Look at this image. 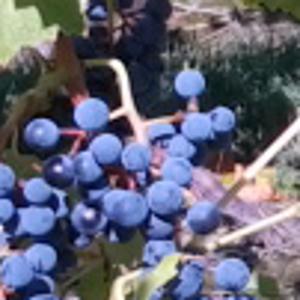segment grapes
Masks as SVG:
<instances>
[{
  "label": "grapes",
  "mask_w": 300,
  "mask_h": 300,
  "mask_svg": "<svg viewBox=\"0 0 300 300\" xmlns=\"http://www.w3.org/2000/svg\"><path fill=\"white\" fill-rule=\"evenodd\" d=\"M213 278V284L218 291L236 293L248 284L250 267L243 260L228 258L215 266Z\"/></svg>",
  "instance_id": "obj_4"
},
{
  "label": "grapes",
  "mask_w": 300,
  "mask_h": 300,
  "mask_svg": "<svg viewBox=\"0 0 300 300\" xmlns=\"http://www.w3.org/2000/svg\"><path fill=\"white\" fill-rule=\"evenodd\" d=\"M187 227L199 238H209L217 234L223 224L220 205L212 199L193 203L186 213Z\"/></svg>",
  "instance_id": "obj_3"
},
{
  "label": "grapes",
  "mask_w": 300,
  "mask_h": 300,
  "mask_svg": "<svg viewBox=\"0 0 300 300\" xmlns=\"http://www.w3.org/2000/svg\"><path fill=\"white\" fill-rule=\"evenodd\" d=\"M207 282V271L197 261H185L171 280V285L160 287L150 300H197Z\"/></svg>",
  "instance_id": "obj_2"
},
{
  "label": "grapes",
  "mask_w": 300,
  "mask_h": 300,
  "mask_svg": "<svg viewBox=\"0 0 300 300\" xmlns=\"http://www.w3.org/2000/svg\"><path fill=\"white\" fill-rule=\"evenodd\" d=\"M75 127L61 128L51 117L27 120L22 128L25 148L49 155L43 177H30L22 199L10 196L16 171L0 164V247L23 237L34 242L24 254L0 259V285L23 300H59L52 273L58 250L44 241L68 221L70 241L89 248L95 238L110 244L129 242L140 229L147 241L140 255L144 273L152 274L167 255L177 250L174 217L183 205V190L194 180L192 165L201 147L231 134L236 114L215 105L210 112H190L180 125L153 123L147 140L129 143L115 130L110 103L86 98L71 111Z\"/></svg>",
  "instance_id": "obj_1"
},
{
  "label": "grapes",
  "mask_w": 300,
  "mask_h": 300,
  "mask_svg": "<svg viewBox=\"0 0 300 300\" xmlns=\"http://www.w3.org/2000/svg\"><path fill=\"white\" fill-rule=\"evenodd\" d=\"M206 78L200 72L182 67L172 78L175 94L183 100H195L205 91Z\"/></svg>",
  "instance_id": "obj_5"
}]
</instances>
